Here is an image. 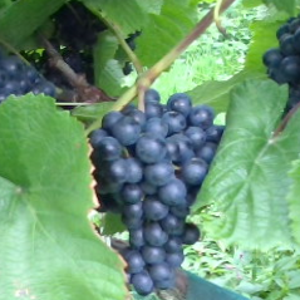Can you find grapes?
Here are the masks:
<instances>
[{
	"label": "grapes",
	"instance_id": "obj_1",
	"mask_svg": "<svg viewBox=\"0 0 300 300\" xmlns=\"http://www.w3.org/2000/svg\"><path fill=\"white\" fill-rule=\"evenodd\" d=\"M224 127L208 104L176 92L162 104L160 92H145V113L134 104L111 110L89 134L110 172L128 182L123 221L130 244L123 248L133 289L148 296L166 290L184 261L182 244L200 235L186 216L214 159Z\"/></svg>",
	"mask_w": 300,
	"mask_h": 300
},
{
	"label": "grapes",
	"instance_id": "obj_2",
	"mask_svg": "<svg viewBox=\"0 0 300 300\" xmlns=\"http://www.w3.org/2000/svg\"><path fill=\"white\" fill-rule=\"evenodd\" d=\"M300 16L291 17L277 31L280 48H273L262 55L263 64L269 68L273 81L300 88Z\"/></svg>",
	"mask_w": 300,
	"mask_h": 300
}]
</instances>
